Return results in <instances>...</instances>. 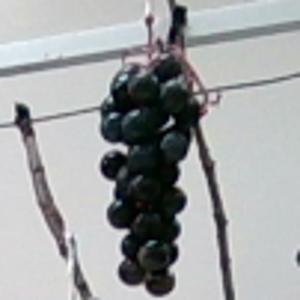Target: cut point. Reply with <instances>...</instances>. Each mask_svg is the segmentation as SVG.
Masks as SVG:
<instances>
[{
  "instance_id": "cut-point-1",
  "label": "cut point",
  "mask_w": 300,
  "mask_h": 300,
  "mask_svg": "<svg viewBox=\"0 0 300 300\" xmlns=\"http://www.w3.org/2000/svg\"><path fill=\"white\" fill-rule=\"evenodd\" d=\"M156 0H144V17L143 23L147 30V60L146 66L152 61V38L153 32L157 27V17L154 14Z\"/></svg>"
}]
</instances>
